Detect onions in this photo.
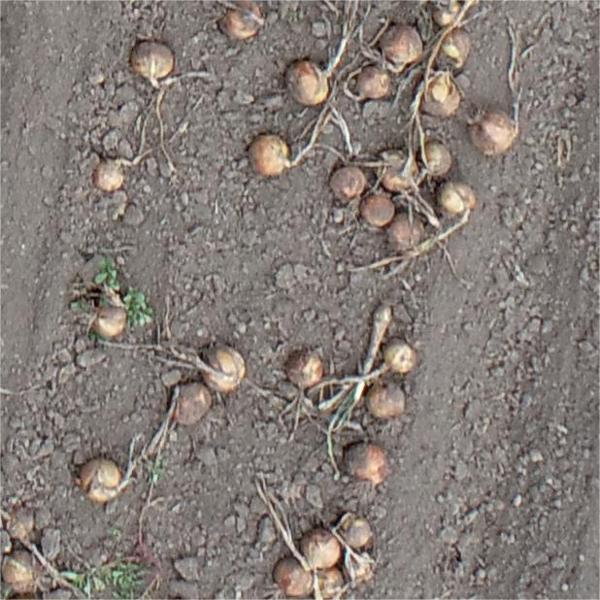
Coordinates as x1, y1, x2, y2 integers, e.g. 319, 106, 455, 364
282, 345, 322, 386
198, 343, 242, 390
420, 140, 451, 174
171, 386, 210, 425
430, 0, 464, 26
436, 30, 467, 65
366, 382, 404, 417
285, 63, 328, 105
312, 569, 342, 599
343, 443, 389, 486
424, 73, 461, 114
3, 555, 34, 589
345, 551, 373, 584
381, 151, 415, 193
219, 3, 259, 39
388, 216, 419, 247
380, 339, 415, 375
129, 43, 172, 81
435, 180, 473, 215
359, 193, 394, 227
78, 456, 122, 501
91, 158, 125, 191
273, 557, 311, 594
247, 132, 289, 176
354, 65, 388, 99
88, 303, 124, 339
302, 529, 338, 568
469, 108, 515, 153
337, 513, 372, 548
380, 23, 422, 66
326, 165, 366, 202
